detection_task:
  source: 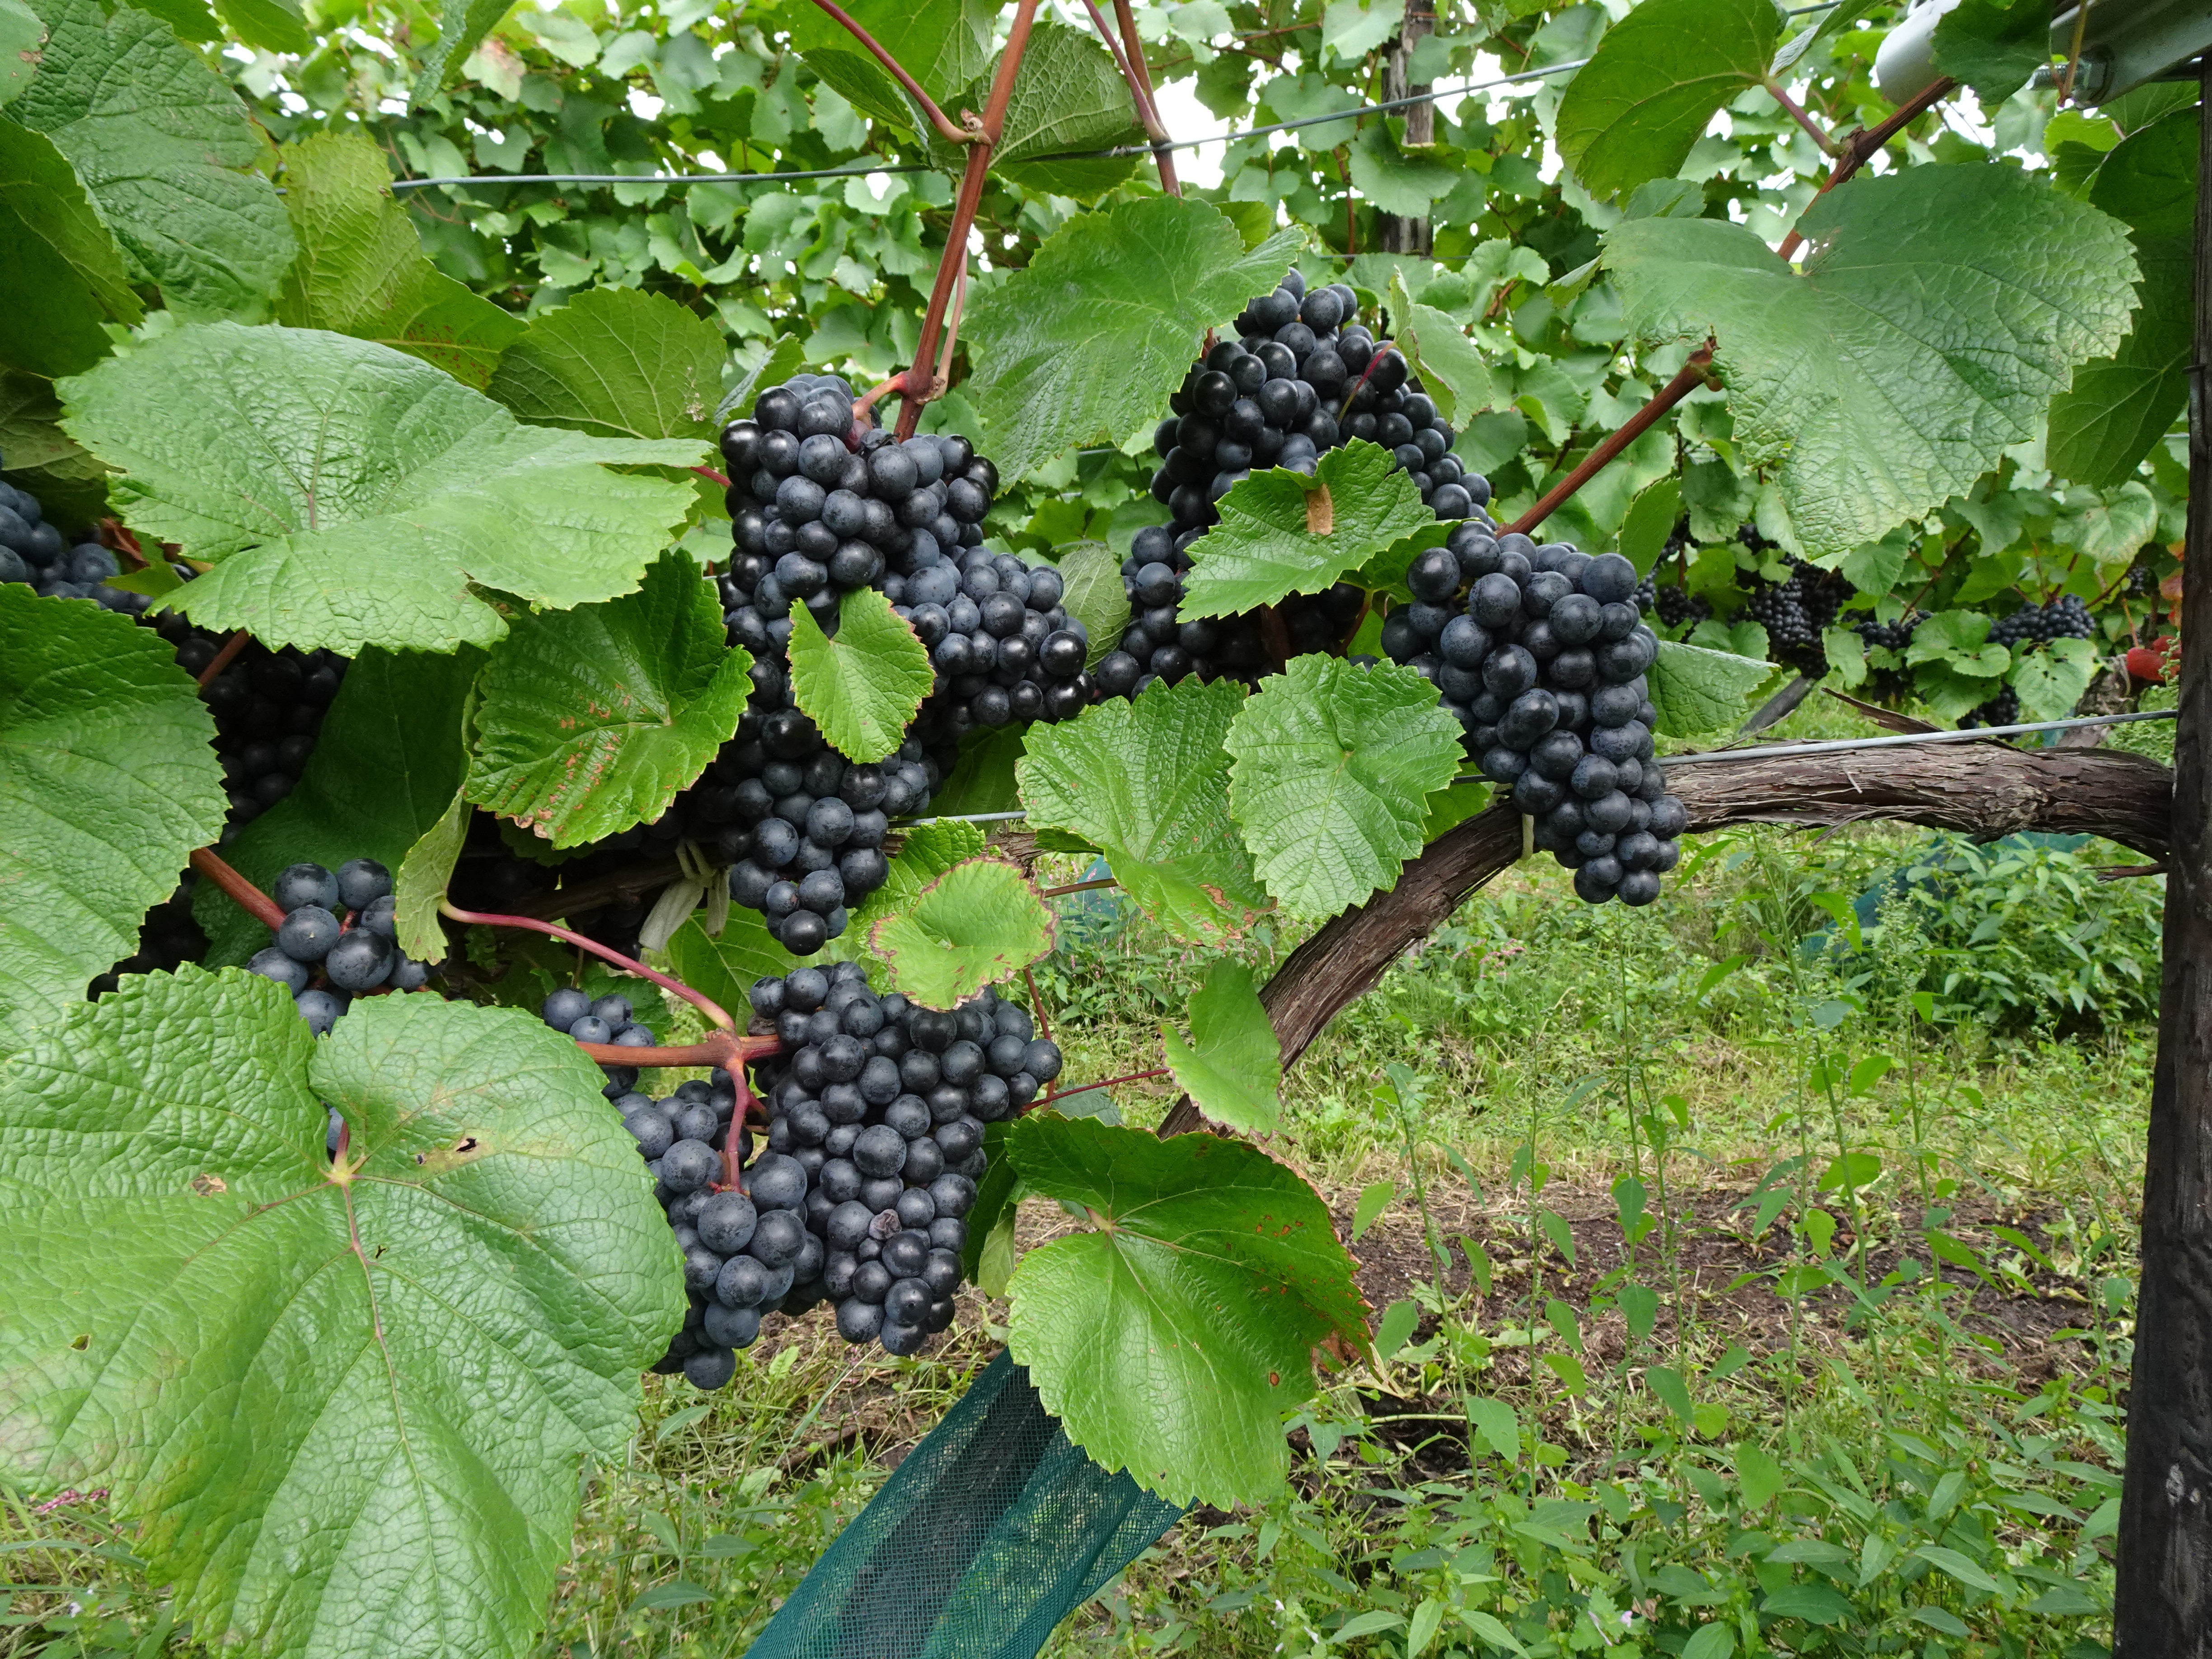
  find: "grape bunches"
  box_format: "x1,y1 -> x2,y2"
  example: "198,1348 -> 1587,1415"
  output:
745,961 -> 1062,1356
561,848 -> 708,971
1096,527 -> 1280,706
87,862 -> 214,1002
601,798 -> 720,856
716,373 -> 894,661
158,626 -> 350,848
609,1063 -> 826,1390
1233,266 -> 1501,532
245,857 -> 450,1152
442,802 -> 559,909
694,654 -> 960,955
1149,341 -> 1339,541
867,434 -> 999,580
543,987 -> 656,1099
871,545 -> 1096,734
1280,582 -> 1366,659
0,481 -> 200,630
1348,520 -> 1688,906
